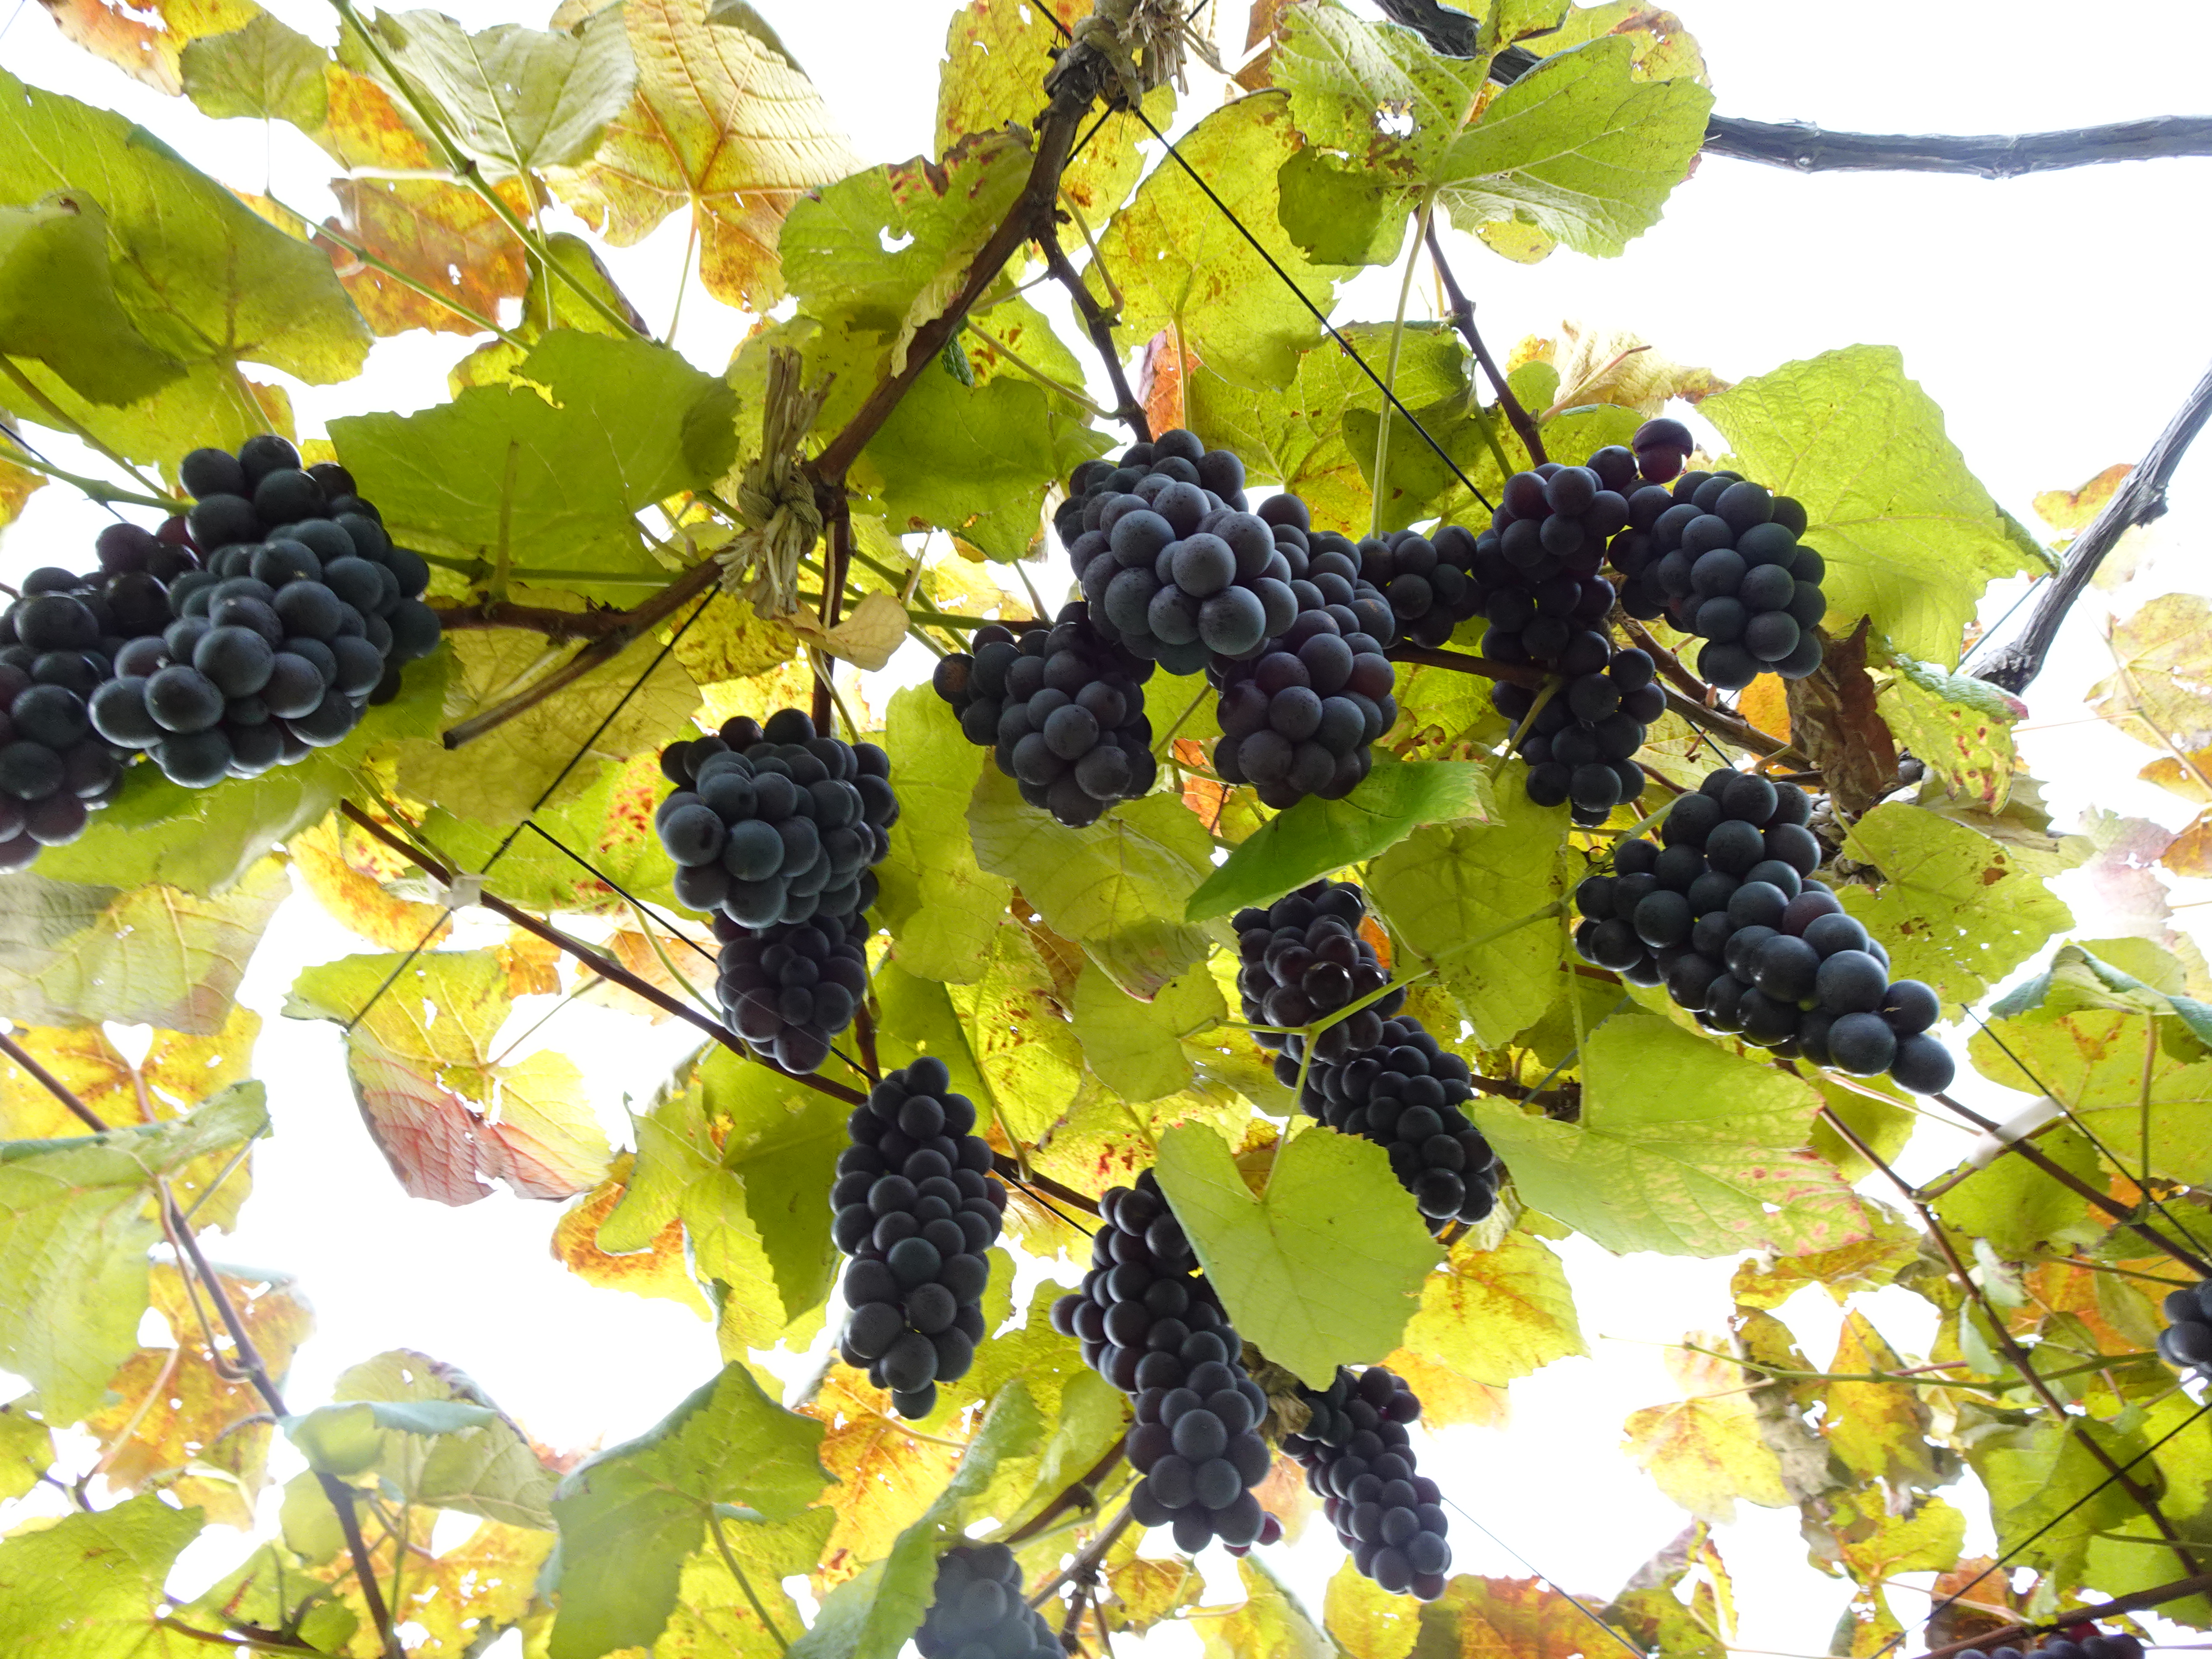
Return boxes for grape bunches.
[908,1526,1066,1659]
[1285,1366,1455,1603]
[1055,420,1297,677]
[2148,1269,2212,1388]
[1617,476,1830,689]
[1228,880,1402,1068]
[931,600,1163,831]
[1349,515,1479,650]
[0,522,168,887]
[1270,1012,1505,1232]
[1209,497,1403,808]
[708,903,870,1077]
[1944,1621,2158,1657]
[92,524,398,790]
[653,704,882,934]
[1570,770,1962,1102]
[1470,415,1694,815]
[825,1059,1012,1426]
[162,436,450,700]
[1058,1162,1285,1564]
